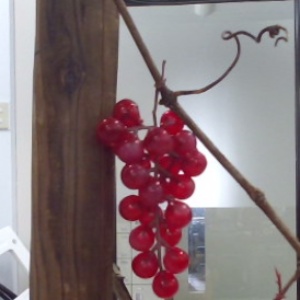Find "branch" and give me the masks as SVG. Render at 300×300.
<instances>
[{
  "instance_id": "30e6481e",
  "label": "branch",
  "mask_w": 300,
  "mask_h": 300,
  "mask_svg": "<svg viewBox=\"0 0 300 300\" xmlns=\"http://www.w3.org/2000/svg\"><path fill=\"white\" fill-rule=\"evenodd\" d=\"M113 3L119 9L121 13L122 21L129 31L130 36L134 40V43L137 45L139 53L145 60L147 66L150 69V72L153 76L154 83H158L159 92L161 94V99L158 101L159 105H164L167 108H170L171 111H174L178 115H180L185 121V125L195 134L200 142L205 146L208 152L216 159L223 168L227 171V173L234 179V181L241 187V189L247 194L250 201L256 205L261 213L267 217V219L278 229L279 233L283 235V237L288 240V243L291 247L295 249V251L300 254V242L297 238L292 237L289 229L282 223L276 212L274 211L271 203L265 197L264 190L256 187L252 183H250L243 175L239 169L234 166L221 152L219 148H217L214 143L207 138V134H205L199 127V125L194 122L191 117L184 111L181 107V104L178 103V96H192V95H202L206 91L213 88L215 85L219 84L236 66L238 59L240 58L241 53V42L237 35L244 34L256 44L261 43L262 35L265 32H269V37L274 39L276 35H279L280 29L285 32L284 36H278L275 40L274 46H278L280 40L283 42H288L289 32L287 28L282 25L274 24L272 26L265 27L261 29L258 33V36L255 38L253 35L248 33L247 31L237 30V32H231L230 30H224L221 32V38L223 40H231L233 37L237 43V55L233 60L231 66L223 72V74L214 82L205 85V87L200 90H191V91H174L170 90L166 85L165 78V64L166 60L162 61V75L159 74L158 70L155 68V62L151 57V52L147 48V45L137 28V25L133 18L130 15L129 8L123 2V0H113Z\"/></svg>"
},
{
  "instance_id": "325d2c04",
  "label": "branch",
  "mask_w": 300,
  "mask_h": 300,
  "mask_svg": "<svg viewBox=\"0 0 300 300\" xmlns=\"http://www.w3.org/2000/svg\"><path fill=\"white\" fill-rule=\"evenodd\" d=\"M299 275L300 270L294 271L288 284H286V286L280 291V293H278V295L274 297V300H280L285 295L287 290L292 286L293 282H295V280L299 278Z\"/></svg>"
}]
</instances>
